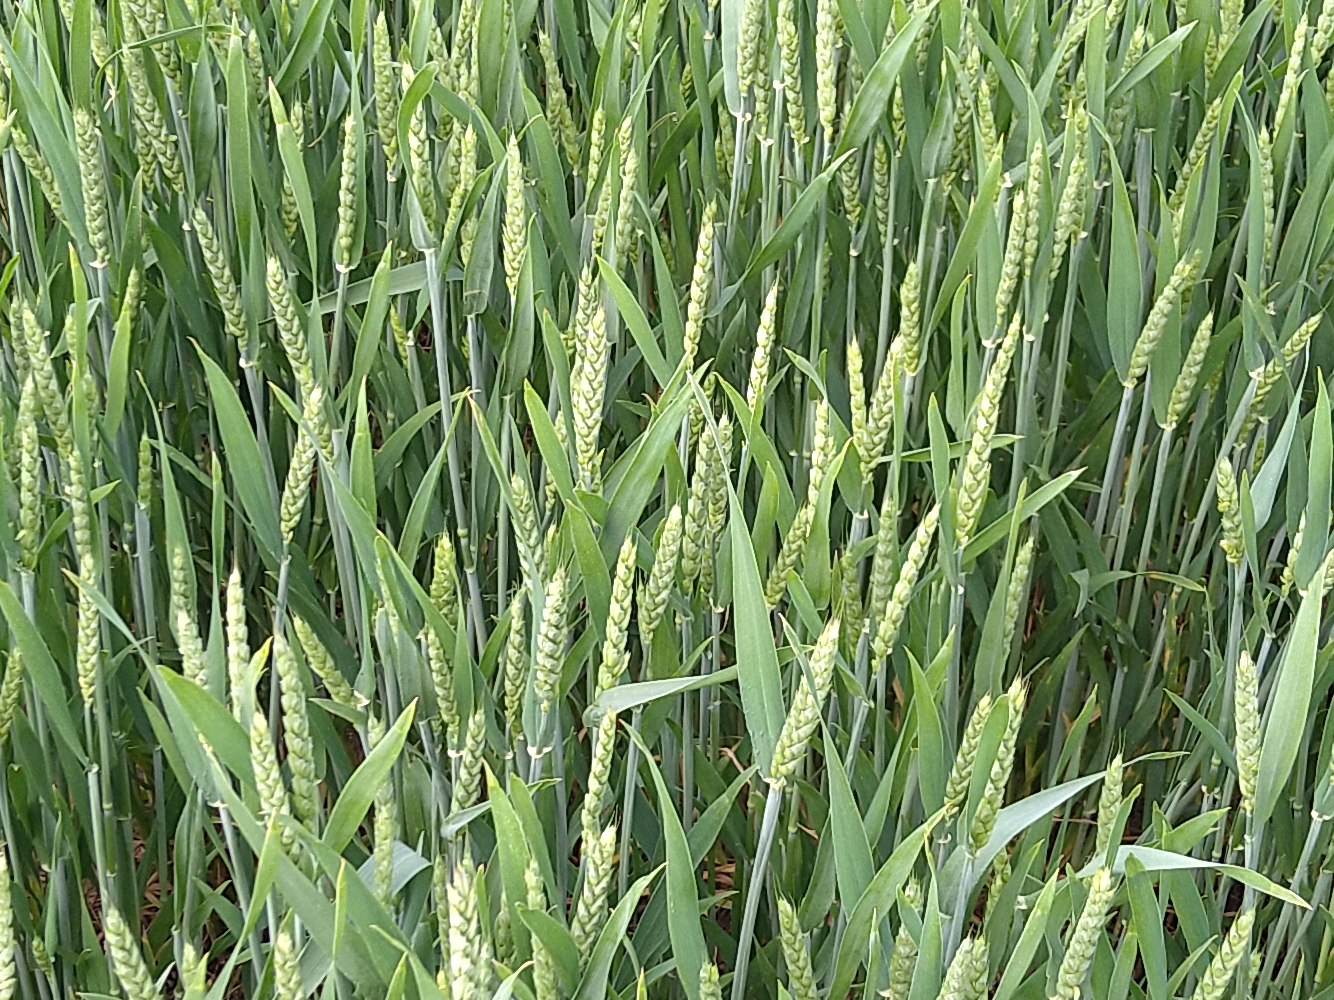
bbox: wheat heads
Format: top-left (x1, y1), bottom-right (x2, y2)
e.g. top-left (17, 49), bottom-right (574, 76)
top-left (683, 423), bottom-right (716, 600)
top-left (443, 0), bottom-right (475, 96)
top-left (872, 136), bottom-right (888, 243)
top-left (135, 434), bottom-right (151, 509)
top-left (770, 621), bottom-right (839, 775)
top-left (660, 0), bottom-right (688, 36)
top-left (992, 189), bottom-right (1028, 318)
top-left (1257, 129), bottom-right (1273, 281)
top-left (32, 935), bottom-right (46, 970)
top-left (1319, 512), bottom-right (1334, 590)
top-left (1223, 0), bottom-right (1245, 68)
top-left (76, 559), bottom-right (98, 711)
top-left (960, 10), bottom-right (980, 62)
top-left (132, 104), bottom-right (159, 199)
top-left (1277, 15), bottom-right (1307, 138)
top-left (974, 85), bottom-right (997, 171)
top-left (526, 863), bottom-right (556, 1000)
top-left (1098, 752), bottom-right (1122, 858)
top-left (0, 852), bottom-right (15, 991)
top-left (847, 337), bottom-right (863, 462)
top-left (773, 897), bottom-right (819, 1000)
top-left (561, 102), bottom-right (582, 160)
top-left (946, 698), bottom-right (991, 824)
top-left (0, 652), bottom-right (22, 735)
top-left (704, 417), bottom-right (732, 594)
top-left (955, 318), bottom-right (1022, 547)
top-left (1327, 67), bottom-right (1334, 116)
top-left (1127, 258), bottom-right (1192, 379)
top-left (582, 676), bottom-right (620, 821)
top-left (1176, 911), bottom-right (1255, 1000)
top-left (755, 28), bottom-right (770, 138)
top-left (55, 0), bottom-right (101, 60)
top-left (447, 118), bottom-right (463, 194)
top-left (248, 30), bottom-right (270, 155)
top-left (449, 857), bottom-right (491, 1000)
top-left (391, 305), bottom-right (409, 367)
top-left (281, 835), bottom-right (335, 903)
top-left (1056, 868), bottom-right (1110, 1000)
top-left (174, 613), bottom-right (210, 691)
top-left (173, 550), bottom-right (185, 622)
top-left (892, 0), bottom-right (927, 131)
top-left (18, 421), bottom-right (39, 553)
top-left (273, 935), bottom-right (321, 1000)
top-left (585, 106), bottom-right (602, 207)
top-left (618, 155), bottom-right (637, 244)
top-left (738, 0), bottom-right (768, 97)
top-left (865, 335), bottom-right (903, 461)
top-left (1168, 313), bottom-right (1213, 426)
top-left (618, 18), bottom-right (640, 62)
top-left (266, 253), bottom-right (334, 456)
top-left (250, 713), bottom-right (290, 830)
top-left (336, 114), bottom-right (357, 245)
top-left (902, 262), bottom-right (921, 369)
top-left (980, 58), bottom-right (998, 96)
top-left (871, 505), bottom-right (941, 668)
top-left (839, 109), bottom-right (859, 237)
top-left (100, 0), bottom-right (178, 80)
top-left (1252, 423), bottom-right (1268, 474)
top-left (509, 585), bottom-right (528, 734)
top-left (122, 269), bottom-right (140, 328)
top-left (698, 959), bottom-right (726, 1000)
top-left (606, 539), bottom-right (636, 675)
top-left (279, 100), bottom-right (303, 241)
top-left (1051, 156), bottom-right (1086, 273)
top-left (371, 14), bottom-right (399, 178)
top-left (1075, 107), bottom-right (1090, 164)
top-left (928, 935), bottom-right (971, 1000)
top-left (1101, 0), bottom-right (1129, 59)
top-left (643, 506), bottom-right (682, 637)
top-left (774, 17), bottom-right (804, 134)
top-left (887, 0), bottom-right (923, 53)
top-left (56, 0), bottom-right (70, 41)
top-left (749, 285), bottom-right (778, 419)
top-left (195, 206), bottom-right (248, 338)
top-left (424, 627), bottom-right (459, 736)
top-left (1229, 949), bottom-right (1262, 1000)
top-left (494, 899), bottom-right (512, 964)
top-left (1000, 538), bottom-right (1035, 676)
top-left (291, 609), bottom-right (357, 704)
top-left (688, 374), bottom-right (715, 444)
top-left (278, 390), bottom-right (321, 550)
top-left (578, 264), bottom-right (597, 372)
top-left (452, 708), bottom-right (488, 801)
top-left (430, 857), bottom-right (450, 970)
top-left (687, 201), bottom-right (717, 374)
top-left (226, 567), bottom-right (250, 691)
top-left (812, 401), bottom-right (836, 510)
top-left (984, 846), bottom-right (1007, 928)
top-left (7, 297), bottom-right (29, 392)
top-left (402, 63), bottom-right (430, 235)
top-left (767, 507), bottom-right (816, 607)
top-left (571, 823), bottom-right (618, 959)
top-left (1024, 139), bottom-right (1047, 270)
top-left (455, 128), bottom-right (477, 244)
top-left (717, 100), bottom-right (734, 176)
top-left (370, 716), bottom-right (401, 898)
top-left (507, 136), bottom-right (529, 288)
top-left (1169, 99), bottom-right (1223, 207)
top-left (574, 305), bottom-right (607, 484)
top-left (123, 0), bottom-right (140, 43)
top-left (470, 4), bottom-right (483, 102)
top-left (1217, 458), bottom-right (1247, 562)
top-left (816, 0), bottom-right (839, 124)
top-left (22, 304), bottom-right (70, 481)
top-left (65, 314), bottom-right (92, 381)
top-left (1202, 39), bottom-right (1213, 99)
top-left (678, 62), bottom-right (693, 99)
top-left (960, 933), bottom-right (991, 1000)
top-left (1101, 31), bottom-right (1144, 168)
top-left (889, 874), bottom-right (924, 997)
top-left (1237, 651), bottom-right (1261, 798)
top-left (538, 570), bottom-right (568, 704)
top-left (1286, 507), bottom-right (1307, 577)
top-left (408, 0), bottom-right (449, 97)
top-left (23, 373), bottom-right (45, 412)
top-left (593, 119), bottom-right (632, 247)
top-left (428, 532), bottom-right (461, 627)
top-left (938, 51), bottom-right (980, 189)
top-left (277, 640), bottom-right (328, 839)
top-left (507, 473), bottom-right (543, 589)
top-left (853, 0), bottom-right (874, 88)
top-left (121, 51), bottom-right (184, 193)
top-left (10, 123), bottom-right (69, 232)
top-left (102, 905), bottom-right (168, 1000)
top-left (0, 14), bottom-right (15, 123)
top-left (549, 408), bottom-right (568, 496)
top-left (1058, 0), bottom-right (1105, 90)
top-left (842, 551), bottom-right (860, 653)
top-left (1237, 313), bottom-right (1322, 450)
top-left (537, 28), bottom-right (566, 155)
top-left (73, 110), bottom-right (105, 259)
top-left (73, 453), bottom-right (94, 559)
top-left (871, 505), bottom-right (898, 624)
top-left (975, 682), bottom-right (1025, 830)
